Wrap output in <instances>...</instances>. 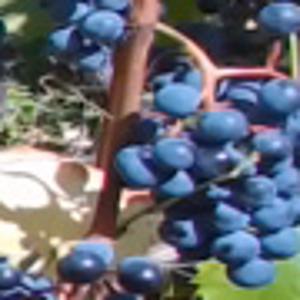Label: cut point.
<instances>
[{"label": "cut point", "instance_id": "6a23745f", "mask_svg": "<svg viewBox=\"0 0 300 300\" xmlns=\"http://www.w3.org/2000/svg\"><path fill=\"white\" fill-rule=\"evenodd\" d=\"M162 32L168 37L172 38L175 42L186 48L206 69V78L200 87L202 94H208L215 83V77L217 78H234V77H247V78H266L270 80H278L280 73L271 69H251V68H229L221 69L215 67L214 63L209 59L208 55L198 46L195 42L188 37L174 29L172 26L158 22L156 24V30Z\"/></svg>", "mask_w": 300, "mask_h": 300}]
</instances>
